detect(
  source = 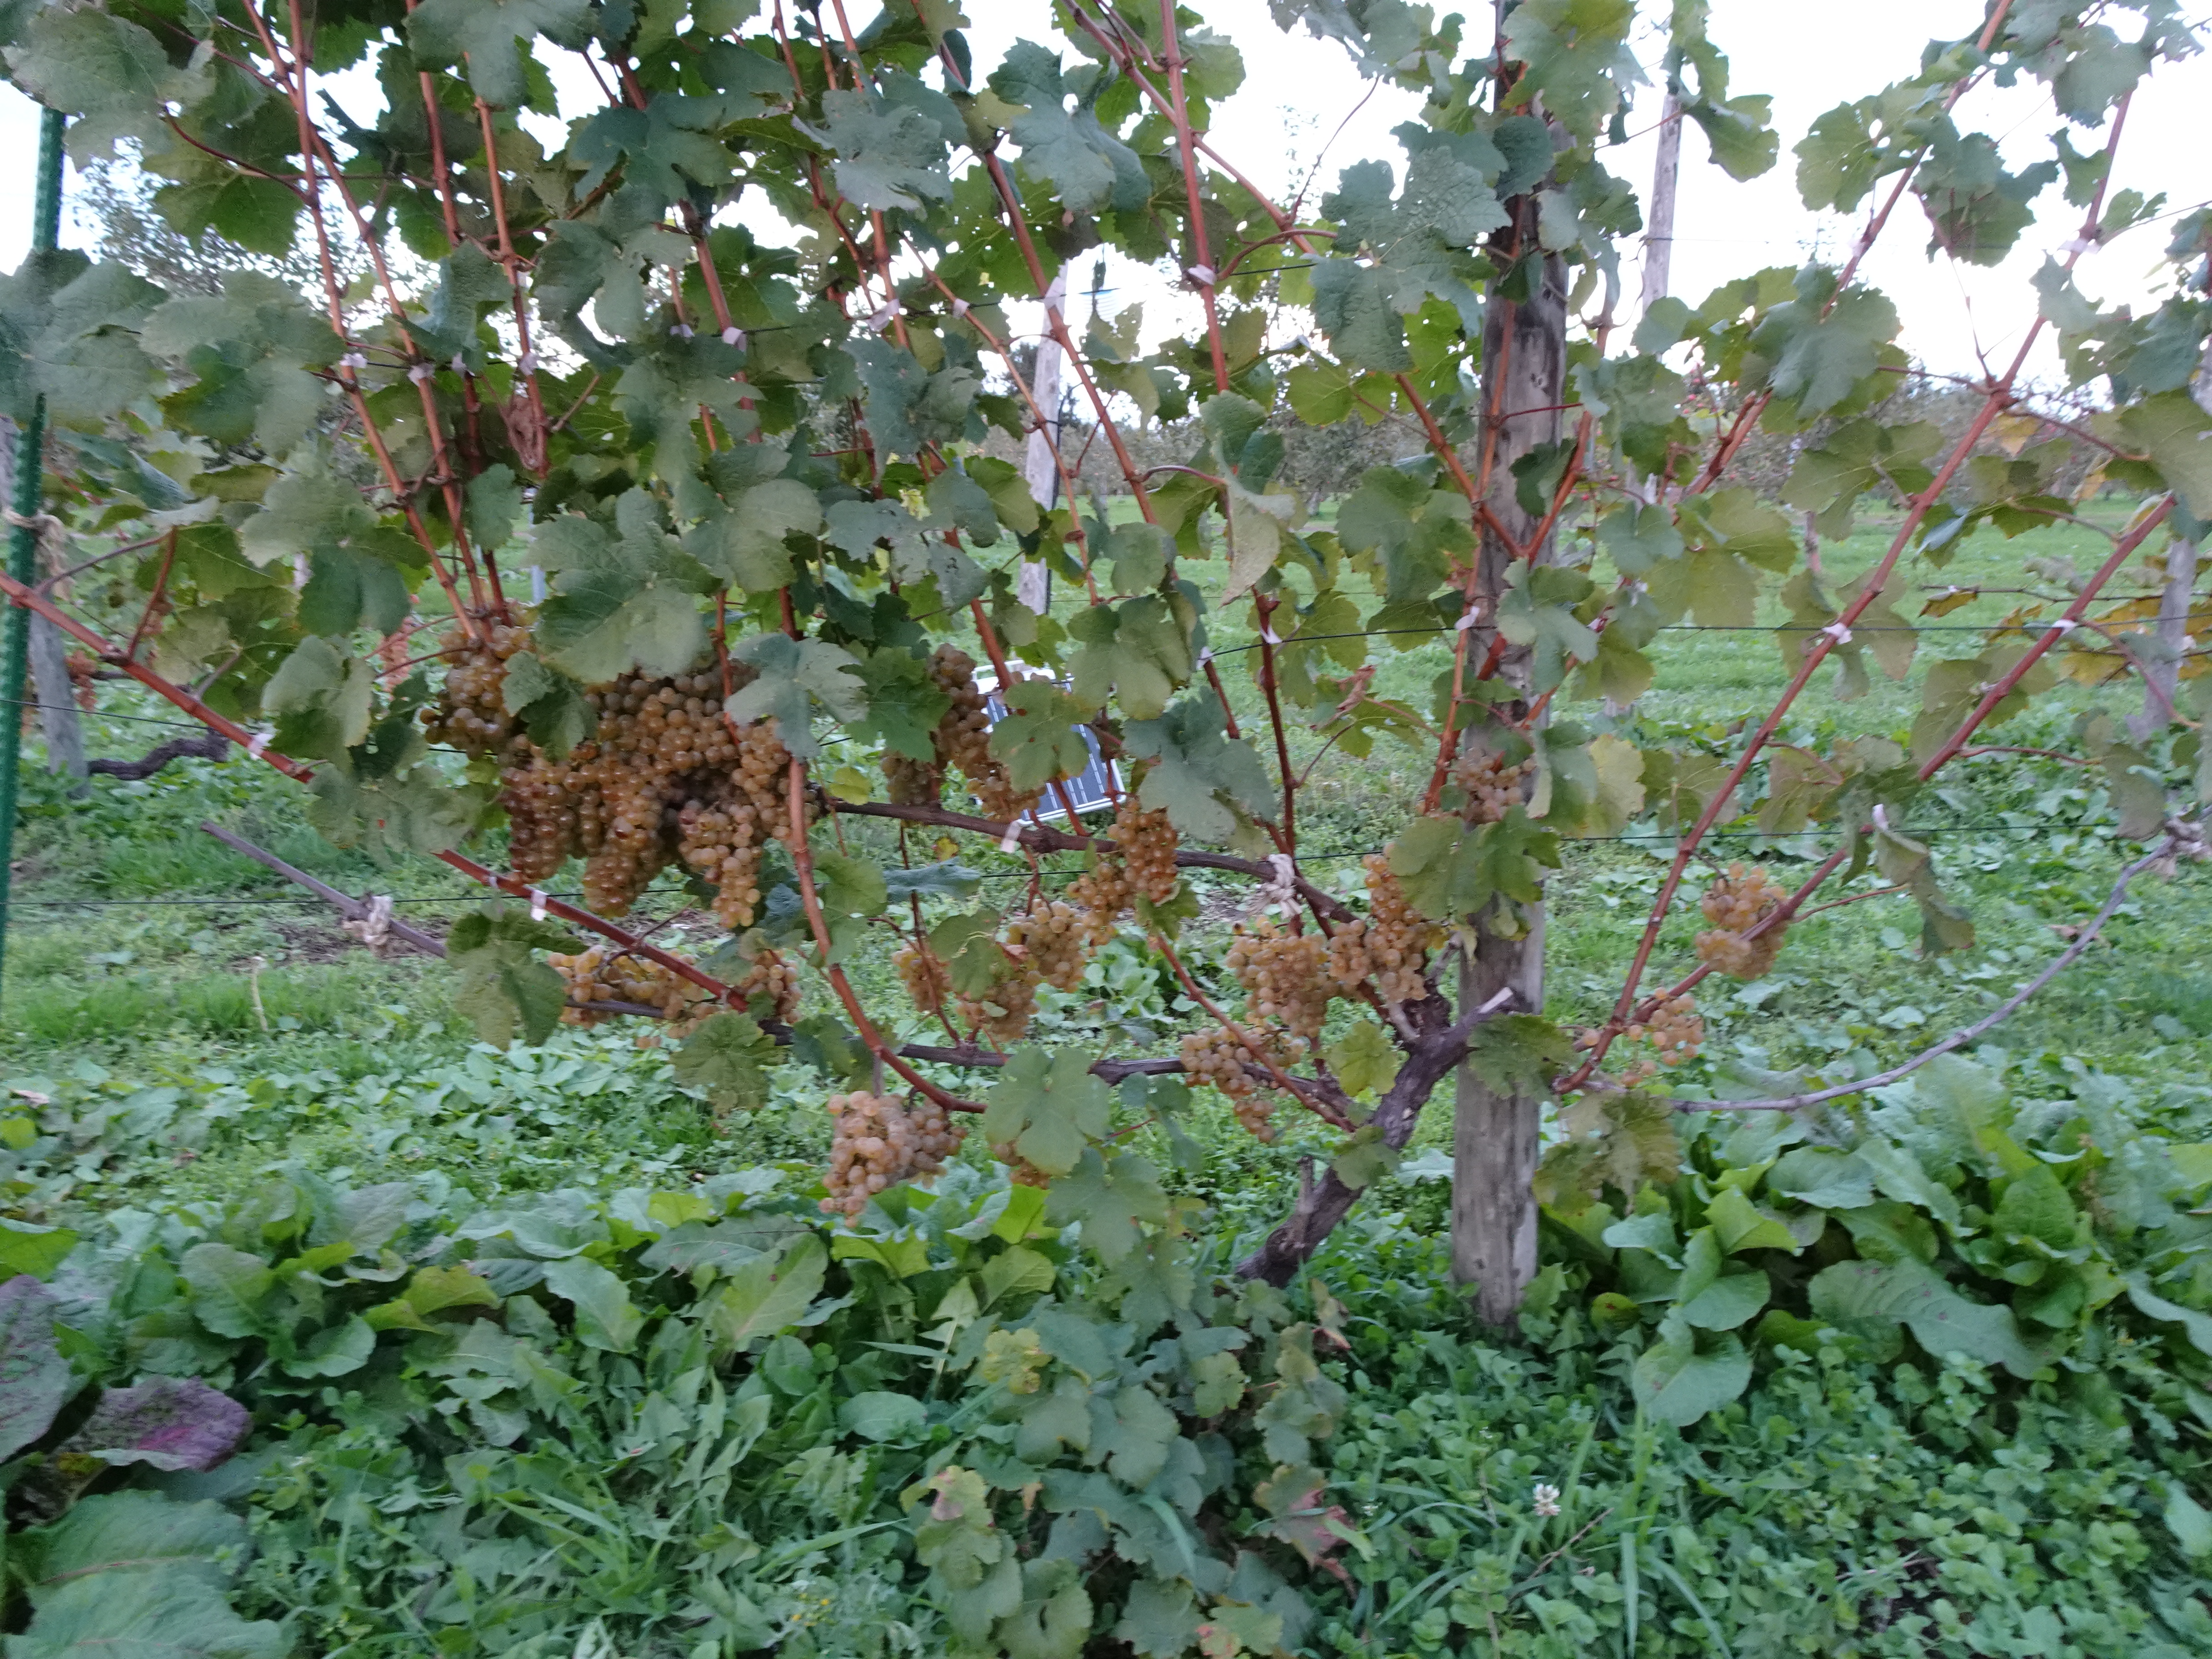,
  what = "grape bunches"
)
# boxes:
[61,642,115,724]
[1450,747,1542,822]
[1178,1020,1303,1144]
[578,769,685,916]
[1062,860,1132,953]
[677,779,768,929]
[425,626,511,761]
[729,945,803,1028]
[891,932,956,1015]
[1703,861,1788,931]
[950,935,1041,1048]
[1796,734,1863,780]
[371,591,416,713]
[965,766,1048,843]
[818,1090,918,1238]
[1409,790,1459,825]
[1693,921,1751,978]
[462,587,538,661]
[613,947,716,1019]
[542,948,617,1030]
[880,748,944,832]
[1327,919,1451,1007]
[1226,913,1328,1038]
[660,655,757,775]
[909,1094,969,1191]
[132,601,170,640]
[20,648,43,739]
[512,728,551,762]
[1584,986,1705,1091]
[1728,923,1785,983]
[1006,896,1095,996]
[495,762,583,889]
[566,673,670,769]
[1105,798,1181,905]
[1362,838,1420,923]
[908,641,995,780]
[634,1029,677,1055]
[985,1126,1062,1192]
[664,1005,744,1043]
[732,715,819,855]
